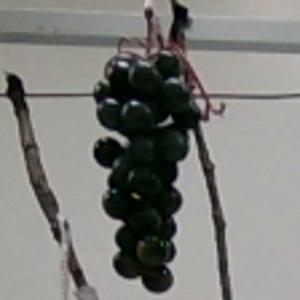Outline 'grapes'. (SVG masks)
Masks as SVG:
<instances>
[{"mask_svg": "<svg viewBox=\"0 0 300 300\" xmlns=\"http://www.w3.org/2000/svg\"><path fill=\"white\" fill-rule=\"evenodd\" d=\"M181 73L175 51L159 50L150 61L132 51L118 52L106 63L105 78L92 88L98 124L127 141L124 147L103 135L92 148L98 166L112 170L102 208L123 223L115 234L121 251L112 267L122 279L140 277L153 295L174 283L167 264L177 255L173 240L178 225L172 215L183 203L182 193L173 187L180 174L177 162L188 155V131L202 118L192 87L179 80Z\"/></svg>", "mask_w": 300, "mask_h": 300, "instance_id": "grapes-1", "label": "grapes"}]
</instances>
